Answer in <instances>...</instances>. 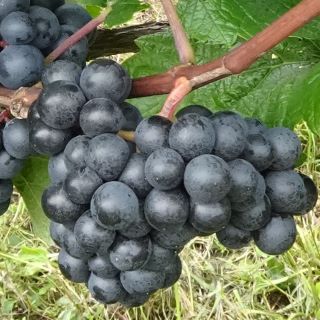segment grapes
<instances>
[{
	"mask_svg": "<svg viewBox=\"0 0 320 320\" xmlns=\"http://www.w3.org/2000/svg\"><path fill=\"white\" fill-rule=\"evenodd\" d=\"M92 19L65 0H0V87L42 82L28 118L0 108V216L10 177L32 152L49 156L41 206L58 265L103 304L143 305L180 277L196 235L268 255L294 245L293 215L316 205L312 179L294 173L302 143L290 129L231 111L187 106L172 123L124 102L133 80L108 58L86 66L97 28L52 63L45 58Z\"/></svg>",
	"mask_w": 320,
	"mask_h": 320,
	"instance_id": "grapes-1",
	"label": "grapes"
}]
</instances>
